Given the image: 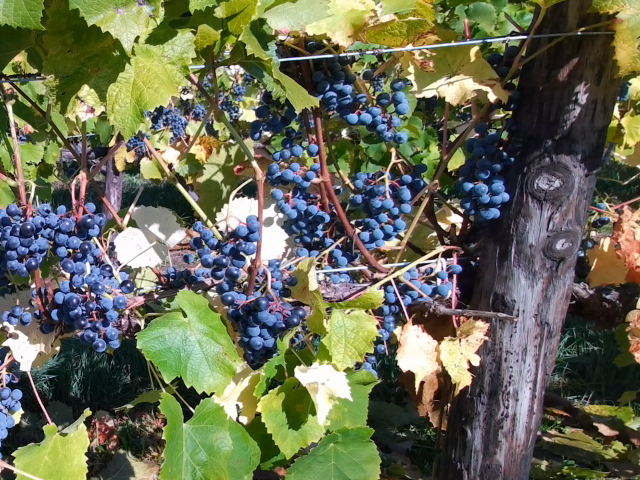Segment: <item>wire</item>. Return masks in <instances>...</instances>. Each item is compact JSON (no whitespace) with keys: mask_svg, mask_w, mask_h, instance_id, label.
<instances>
[{"mask_svg":"<svg viewBox=\"0 0 640 480\" xmlns=\"http://www.w3.org/2000/svg\"><path fill=\"white\" fill-rule=\"evenodd\" d=\"M615 33L614 29L610 30H595V31H586V32H574V31H558L552 33H535V34H525V35H504L499 37H488L483 39H472V40H454V41H443L436 42L430 44H422V45H411V46H395L390 49H378V50H352V51H344L337 53H328V54H317V55H305V56H294V57H285L279 58V63H287V62H297V61H307V60H320V59H330V58H339L346 56H355V55H380V54H392L398 51H413V50H424V49H432L439 48L445 46H456L460 45L461 47L476 45V44H485L490 42H501L507 40H527V39H538V38H554L560 36H572V37H589V36H597V35H613Z\"/></svg>","mask_w":640,"mask_h":480,"instance_id":"wire-1","label":"wire"},{"mask_svg":"<svg viewBox=\"0 0 640 480\" xmlns=\"http://www.w3.org/2000/svg\"><path fill=\"white\" fill-rule=\"evenodd\" d=\"M369 268H370L369 264H361V265L347 266L343 268L317 269L315 271V274L320 275V274H332V273H345L349 271L364 270Z\"/></svg>","mask_w":640,"mask_h":480,"instance_id":"wire-2","label":"wire"}]
</instances>
